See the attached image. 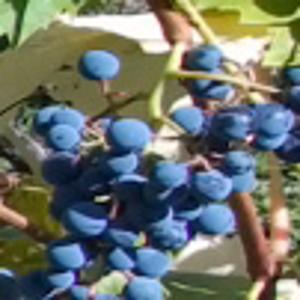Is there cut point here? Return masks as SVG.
Wrapping results in <instances>:
<instances>
[{"label": "cut point", "mask_w": 300, "mask_h": 300, "mask_svg": "<svg viewBox=\"0 0 300 300\" xmlns=\"http://www.w3.org/2000/svg\"><path fill=\"white\" fill-rule=\"evenodd\" d=\"M182 57V50H171L168 54L161 72L149 92L147 101V117L149 119H159L161 117V100L167 80H176L183 77V71L180 69Z\"/></svg>", "instance_id": "cut-point-1"}]
</instances>
